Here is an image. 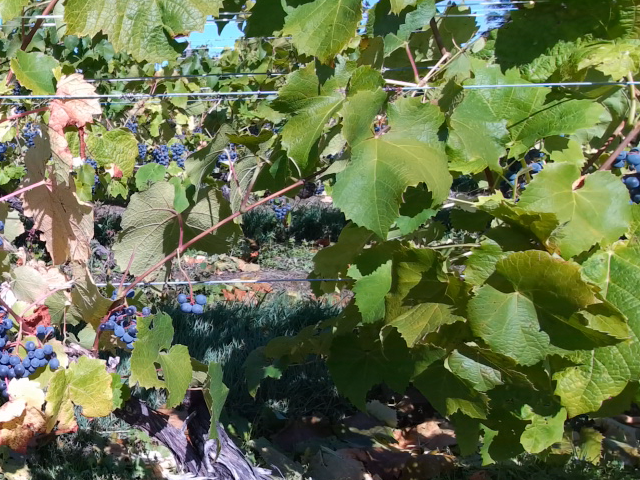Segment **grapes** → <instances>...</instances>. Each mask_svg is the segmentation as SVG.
<instances>
[{
    "label": "grapes",
    "mask_w": 640,
    "mask_h": 480,
    "mask_svg": "<svg viewBox=\"0 0 640 480\" xmlns=\"http://www.w3.org/2000/svg\"><path fill=\"white\" fill-rule=\"evenodd\" d=\"M12 327L13 320L8 316H4L2 324H0V391L2 398L9 397L7 384L4 381L6 377L8 379L15 377L16 380H19L23 377H29L38 367L49 365L51 369H58L60 365V359L54 352L52 345H44L42 348L36 349L34 341L25 342L27 356L23 361L17 355H10L13 353L14 348L8 347L5 350L4 348L9 341V336L6 332Z\"/></svg>",
    "instance_id": "01657485"
},
{
    "label": "grapes",
    "mask_w": 640,
    "mask_h": 480,
    "mask_svg": "<svg viewBox=\"0 0 640 480\" xmlns=\"http://www.w3.org/2000/svg\"><path fill=\"white\" fill-rule=\"evenodd\" d=\"M136 312L137 307L135 305H128L121 308L119 311H113L112 315L107 319V321L99 326V329L101 331L114 332V335L117 338H120V341L122 343H126L127 349H133L134 345L132 343L135 342L138 337L136 319H130L131 325L129 326V329L127 331L126 321L124 319L119 320L118 316H122L123 314H125L127 317H131Z\"/></svg>",
    "instance_id": "b958b902"
},
{
    "label": "grapes",
    "mask_w": 640,
    "mask_h": 480,
    "mask_svg": "<svg viewBox=\"0 0 640 480\" xmlns=\"http://www.w3.org/2000/svg\"><path fill=\"white\" fill-rule=\"evenodd\" d=\"M626 161L630 164L629 168L635 170L633 173L627 174L622 183L627 186L630 191L629 201L638 204L640 202V146H632L630 151L623 150L612 163L614 168H623Z\"/></svg>",
    "instance_id": "0513c4c2"
},
{
    "label": "grapes",
    "mask_w": 640,
    "mask_h": 480,
    "mask_svg": "<svg viewBox=\"0 0 640 480\" xmlns=\"http://www.w3.org/2000/svg\"><path fill=\"white\" fill-rule=\"evenodd\" d=\"M177 302L180 304V311L182 313H193L195 315H201L203 313V306L208 303L207 297L203 293H198L195 297V304L189 302L188 296L185 293H180L177 296Z\"/></svg>",
    "instance_id": "84f90ec7"
},
{
    "label": "grapes",
    "mask_w": 640,
    "mask_h": 480,
    "mask_svg": "<svg viewBox=\"0 0 640 480\" xmlns=\"http://www.w3.org/2000/svg\"><path fill=\"white\" fill-rule=\"evenodd\" d=\"M545 153L543 151H539L538 149H531L529 152L524 154V162L528 165L530 169L534 173L541 171L544 166V162L542 160L533 161L534 159L543 158Z\"/></svg>",
    "instance_id": "f8a65327"
},
{
    "label": "grapes",
    "mask_w": 640,
    "mask_h": 480,
    "mask_svg": "<svg viewBox=\"0 0 640 480\" xmlns=\"http://www.w3.org/2000/svg\"><path fill=\"white\" fill-rule=\"evenodd\" d=\"M523 168L522 162L520 160L515 161L513 164L509 166V171L506 174V179L510 185H514L516 183V178L518 177V172Z\"/></svg>",
    "instance_id": "5460f4e3"
},
{
    "label": "grapes",
    "mask_w": 640,
    "mask_h": 480,
    "mask_svg": "<svg viewBox=\"0 0 640 480\" xmlns=\"http://www.w3.org/2000/svg\"><path fill=\"white\" fill-rule=\"evenodd\" d=\"M49 331L51 332V335H52V336H55V335H56V328H55V327H52V326H45V325H42V324H38V325L36 326V337H37L39 340H43V339H44V336H45L46 334H48V333H49Z\"/></svg>",
    "instance_id": "83cd7487"
}]
</instances>
